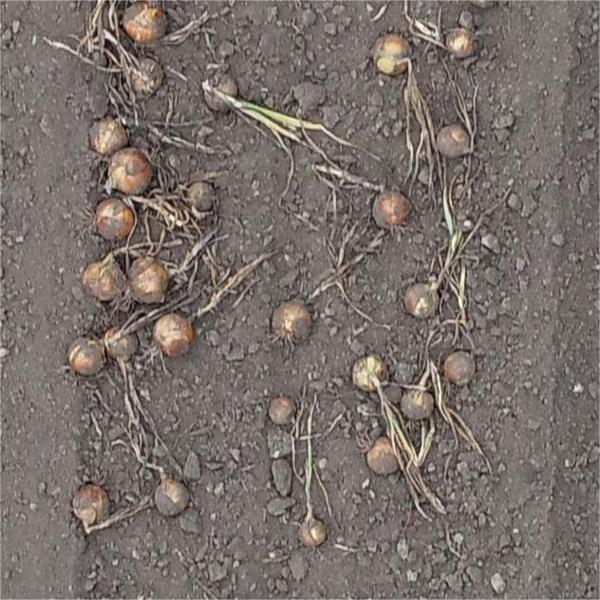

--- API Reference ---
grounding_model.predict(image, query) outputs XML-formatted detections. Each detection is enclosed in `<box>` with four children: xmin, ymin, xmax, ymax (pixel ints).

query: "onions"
<box><xmin>72</xmin><ymin>484</ymin><xmax>107</xmax><ymax>524</ymax></box>
<box><xmin>127</xmin><ymin>255</ymin><xmax>167</xmax><ymax>299</ymax></box>
<box><xmin>67</xmin><ymin>337</ymin><xmax>105</xmax><ymax>375</ymax></box>
<box><xmin>83</xmin><ymin>258</ymin><xmax>123</xmax><ymax>301</ymax></box>
<box><xmin>371</xmin><ymin>34</ymin><xmax>412</xmax><ymax>75</ymax></box>
<box><xmin>107</xmin><ymin>147</ymin><xmax>150</xmax><ymax>192</ymax></box>
<box><xmin>124</xmin><ymin>57</ymin><xmax>160</xmax><ymax>93</ymax></box>
<box><xmin>445</xmin><ymin>28</ymin><xmax>474</xmax><ymax>56</ymax></box>
<box><xmin>367</xmin><ymin>439</ymin><xmax>400</xmax><ymax>473</ymax></box>
<box><xmin>152</xmin><ymin>313</ymin><xmax>193</xmax><ymax>354</ymax></box>
<box><xmin>297</xmin><ymin>519</ymin><xmax>325</xmax><ymax>548</ymax></box>
<box><xmin>91</xmin><ymin>117</ymin><xmax>125</xmax><ymax>152</ymax></box>
<box><xmin>442</xmin><ymin>351</ymin><xmax>474</xmax><ymax>383</ymax></box>
<box><xmin>372</xmin><ymin>188</ymin><xmax>411</xmax><ymax>226</ymax></box>
<box><xmin>402</xmin><ymin>389</ymin><xmax>432</xmax><ymax>418</ymax></box>
<box><xmin>186</xmin><ymin>183</ymin><xmax>214</xmax><ymax>212</ymax></box>
<box><xmin>94</xmin><ymin>199</ymin><xmax>134</xmax><ymax>237</ymax></box>
<box><xmin>435</xmin><ymin>126</ymin><xmax>468</xmax><ymax>157</ymax></box>
<box><xmin>267</xmin><ymin>396</ymin><xmax>295</xmax><ymax>424</ymax></box>
<box><xmin>402</xmin><ymin>283</ymin><xmax>435</xmax><ymax>317</ymax></box>
<box><xmin>123</xmin><ymin>4</ymin><xmax>164</xmax><ymax>43</ymax></box>
<box><xmin>351</xmin><ymin>356</ymin><xmax>387</xmax><ymax>391</ymax></box>
<box><xmin>270</xmin><ymin>300</ymin><xmax>310</xmax><ymax>342</ymax></box>
<box><xmin>155</xmin><ymin>479</ymin><xmax>190</xmax><ymax>516</ymax></box>
<box><xmin>204</xmin><ymin>76</ymin><xmax>236</xmax><ymax>111</ymax></box>
<box><xmin>104</xmin><ymin>325</ymin><xmax>139</xmax><ymax>360</ymax></box>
